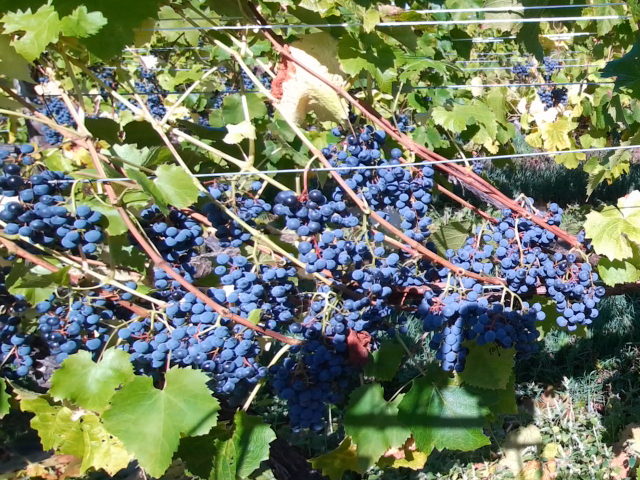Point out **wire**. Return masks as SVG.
Returning a JSON list of instances; mask_svg holds the SVG:
<instances>
[{
  "instance_id": "wire-5",
  "label": "wire",
  "mask_w": 640,
  "mask_h": 480,
  "mask_svg": "<svg viewBox=\"0 0 640 480\" xmlns=\"http://www.w3.org/2000/svg\"><path fill=\"white\" fill-rule=\"evenodd\" d=\"M306 171L305 167L302 168H294V169H282V170H272V171H222L215 173H199L195 172L194 176L197 178H217L224 176H238V177H246L252 178L255 176H275V175H284V174H296V173H304Z\"/></svg>"
},
{
  "instance_id": "wire-1",
  "label": "wire",
  "mask_w": 640,
  "mask_h": 480,
  "mask_svg": "<svg viewBox=\"0 0 640 480\" xmlns=\"http://www.w3.org/2000/svg\"><path fill=\"white\" fill-rule=\"evenodd\" d=\"M640 144L637 145H609L604 147L595 148H574L570 150H558L554 152H529V153H505L496 155H477V156H464L456 158H440L429 162H404L395 164H369V165H345L335 166V171H347V170H371V169H398L407 167H431L442 163H459L466 161H479V160H498L507 158H531V157H556L560 155H572L576 153H598L611 150H639Z\"/></svg>"
},
{
  "instance_id": "wire-6",
  "label": "wire",
  "mask_w": 640,
  "mask_h": 480,
  "mask_svg": "<svg viewBox=\"0 0 640 480\" xmlns=\"http://www.w3.org/2000/svg\"><path fill=\"white\" fill-rule=\"evenodd\" d=\"M132 176H114L107 178H99V179H90V180H50V179H42V184L47 185H92V184H101V183H109L116 181H132Z\"/></svg>"
},
{
  "instance_id": "wire-3",
  "label": "wire",
  "mask_w": 640,
  "mask_h": 480,
  "mask_svg": "<svg viewBox=\"0 0 640 480\" xmlns=\"http://www.w3.org/2000/svg\"><path fill=\"white\" fill-rule=\"evenodd\" d=\"M627 1H611V2H558L556 4H542V5H533L530 7H520V8H498L491 9L487 7H476V6H452L445 8H427V9H419V14H429V13H447L454 11H474V12H485L489 14H500V13H522V12H532L535 10H544V9H558L560 7H613V6H627Z\"/></svg>"
},
{
  "instance_id": "wire-2",
  "label": "wire",
  "mask_w": 640,
  "mask_h": 480,
  "mask_svg": "<svg viewBox=\"0 0 640 480\" xmlns=\"http://www.w3.org/2000/svg\"><path fill=\"white\" fill-rule=\"evenodd\" d=\"M629 14H613V15H569L565 17H546V18H514V19H494L491 17H468L458 18L454 21H439V20H425V19H409V20H395V21H375V26H397V25H411V24H423V25H437V26H456L460 23L470 22H488L492 24H516V23H535L544 24L549 22H567L571 20H615V19H629Z\"/></svg>"
},
{
  "instance_id": "wire-4",
  "label": "wire",
  "mask_w": 640,
  "mask_h": 480,
  "mask_svg": "<svg viewBox=\"0 0 640 480\" xmlns=\"http://www.w3.org/2000/svg\"><path fill=\"white\" fill-rule=\"evenodd\" d=\"M342 25L351 27L352 23L344 20H335L333 22H321L317 24H301V23H239L226 25H207V26H173L170 28L159 27H143V32L172 33L175 31H209V30H228L241 28H299V29H319L323 27H335Z\"/></svg>"
}]
</instances>
